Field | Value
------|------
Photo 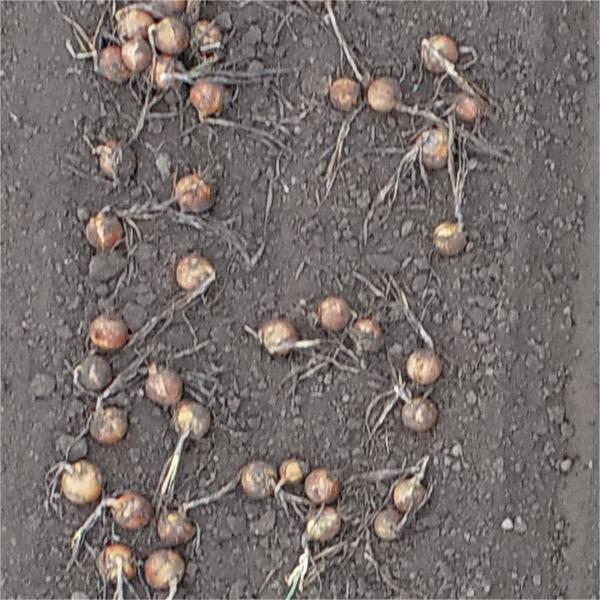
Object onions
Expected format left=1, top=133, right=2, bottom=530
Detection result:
left=327, top=76, right=359, bottom=109
left=95, top=44, right=131, bottom=82
left=304, top=508, right=339, bottom=541
left=98, top=139, right=135, bottom=181
left=175, top=171, right=213, bottom=210
left=169, top=400, right=211, bottom=437
left=188, top=79, right=227, bottom=116
left=85, top=211, right=121, bottom=248
left=59, top=460, right=100, bottom=504
left=117, top=6, right=154, bottom=39
left=155, top=509, right=193, bottom=544
left=278, top=456, right=304, bottom=484
left=316, top=294, right=350, bottom=331
left=144, top=366, right=182, bottom=403
left=405, top=349, right=441, bottom=384
left=150, top=17, right=185, bottom=54
left=150, top=56, right=180, bottom=87
left=89, top=406, right=126, bottom=442
left=390, top=476, right=423, bottom=510
left=400, top=397, right=436, bottom=430
left=305, top=468, right=338, bottom=501
left=431, top=217, right=464, bottom=256
left=160, top=0, right=189, bottom=21
left=237, top=459, right=274, bottom=495
left=176, top=253, right=213, bottom=291
left=414, top=127, right=449, bottom=166
left=122, top=39, right=152, bottom=73
left=112, top=491, right=149, bottom=529
left=349, top=316, right=382, bottom=342
left=142, top=549, right=184, bottom=588
left=364, top=77, right=400, bottom=112
left=450, top=93, right=481, bottom=123
left=189, top=20, right=225, bottom=59
left=259, top=316, right=294, bottom=352
left=370, top=508, right=398, bottom=538
left=421, top=32, right=457, bottom=71
left=88, top=314, right=128, bottom=352
left=97, top=546, right=137, bottom=584
left=74, top=355, right=111, bottom=389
